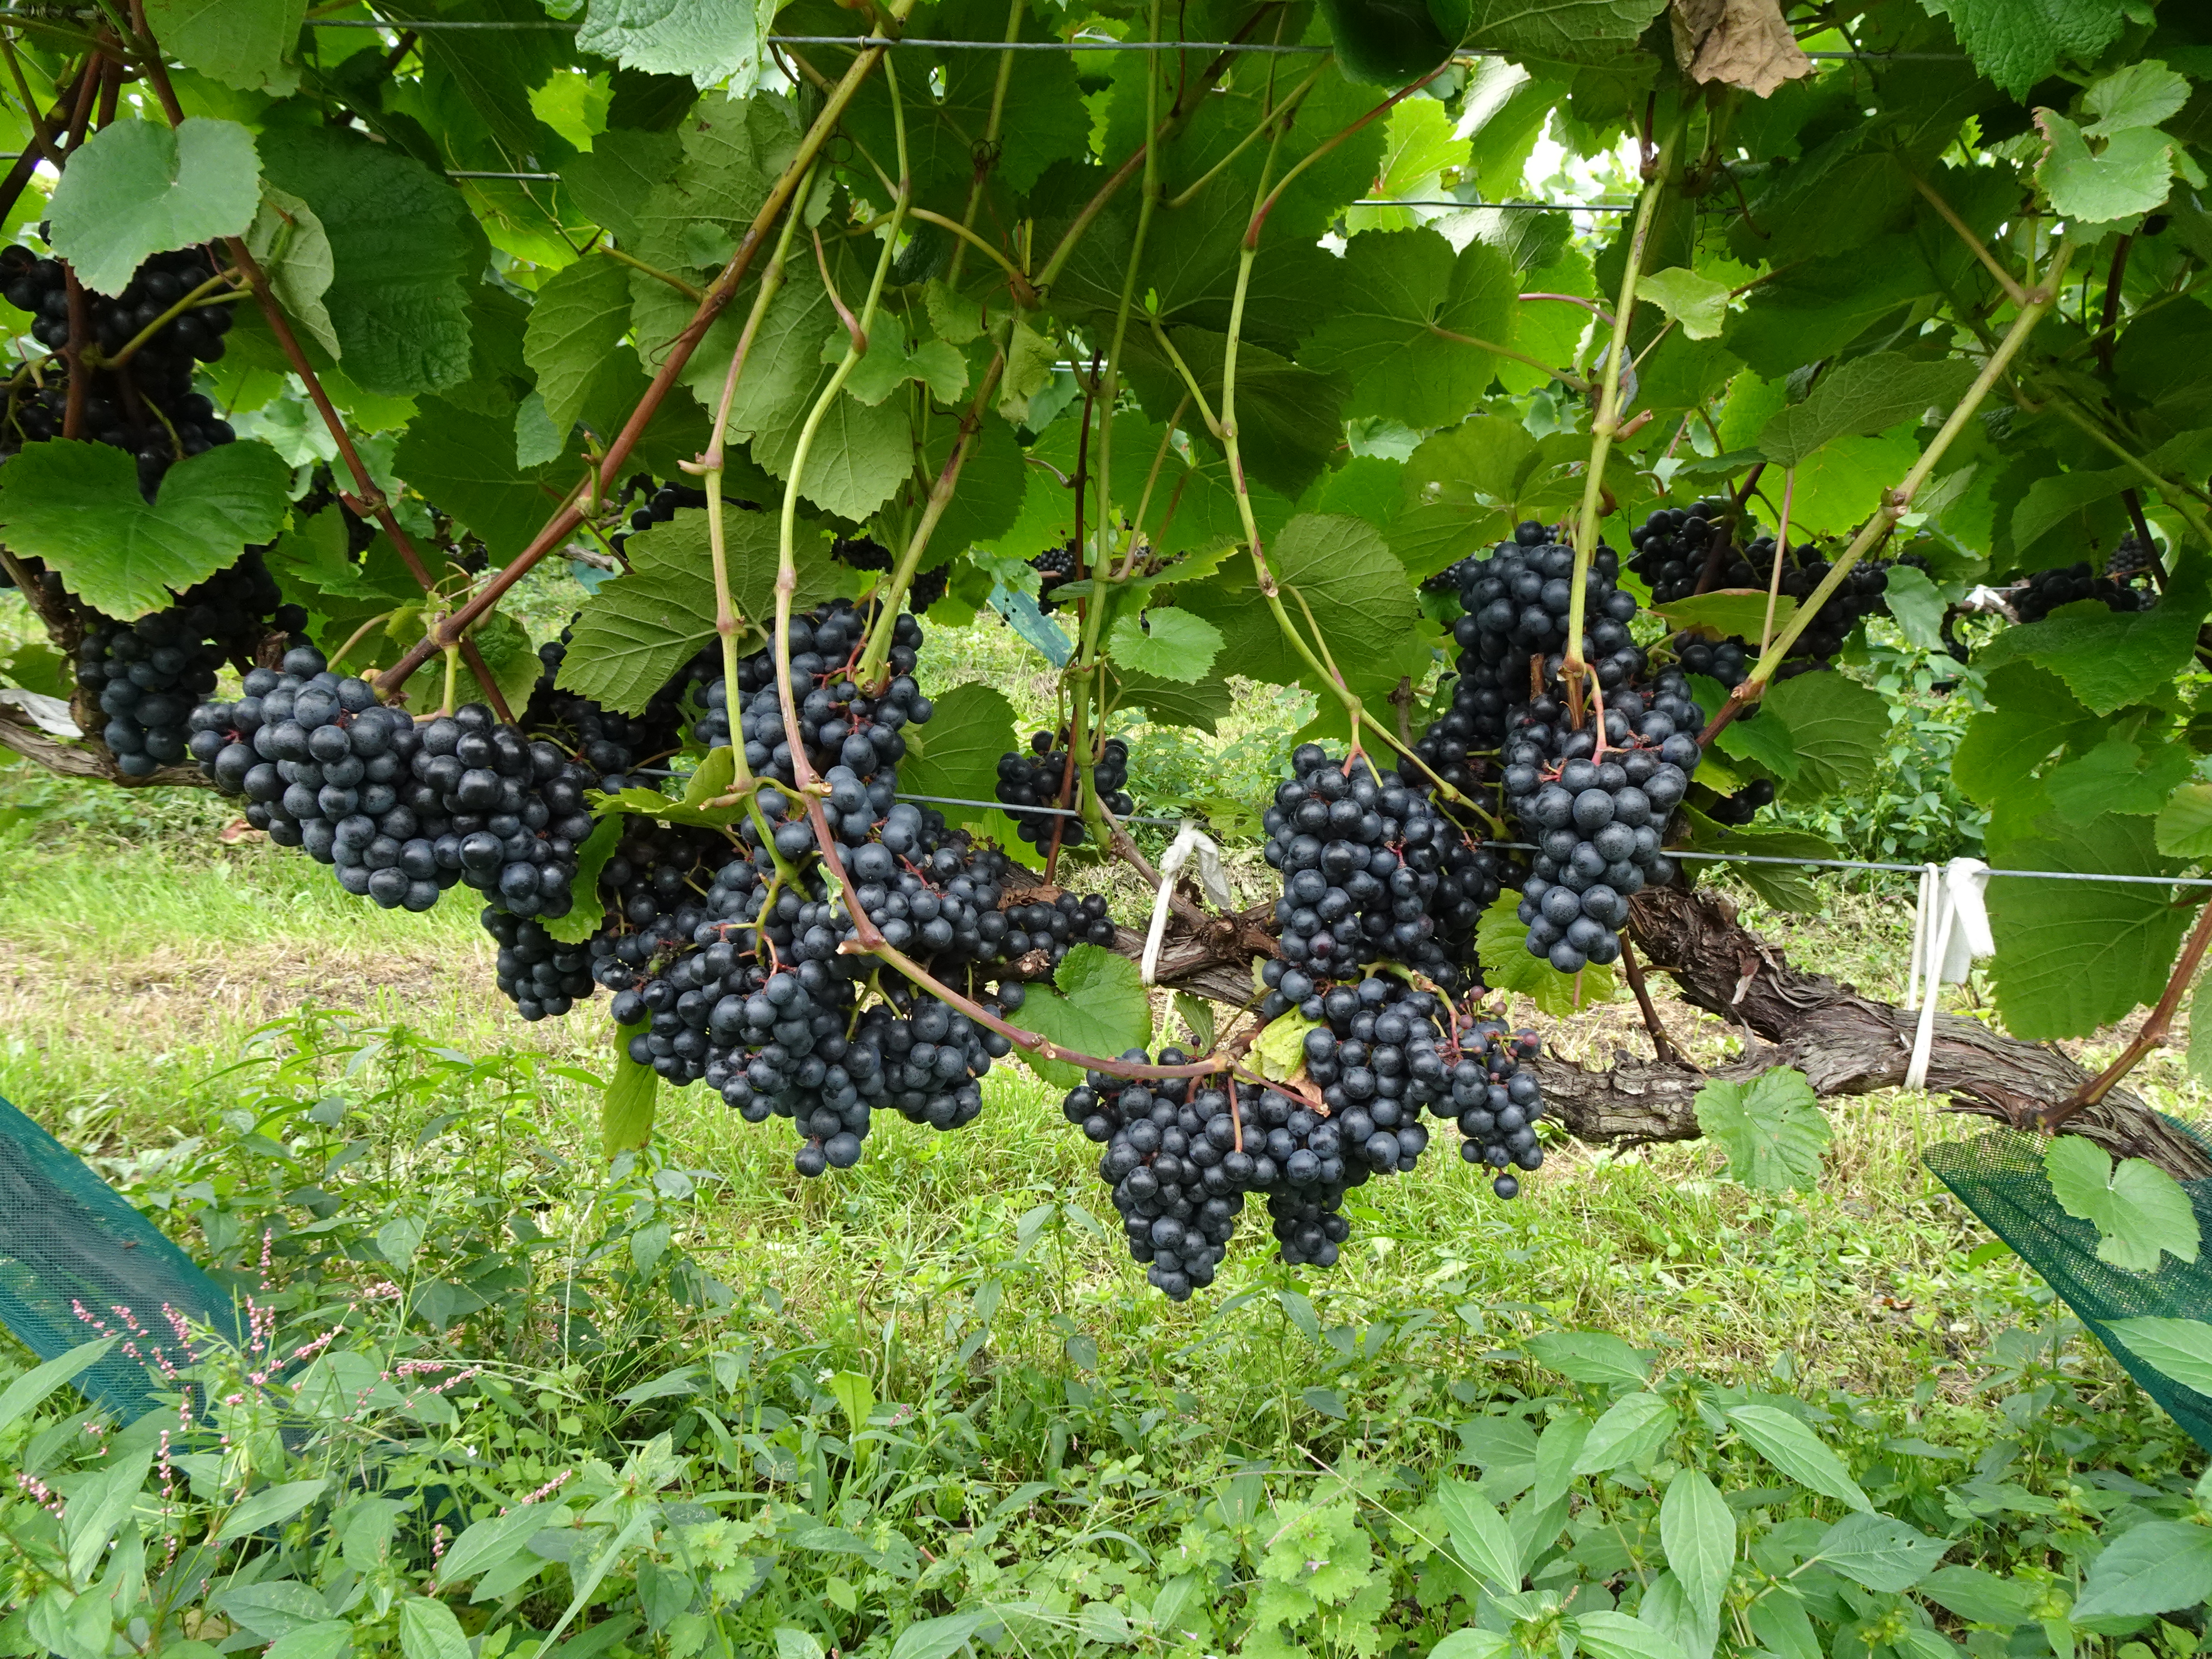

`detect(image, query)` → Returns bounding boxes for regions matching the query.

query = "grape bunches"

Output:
[997,735,1085,857]
[1265,1145,1371,1268]
[0,361,242,504]
[188,645,330,844]
[708,955,843,1120]
[1264,744,1382,1021]
[1451,522,1650,693]
[602,810,746,913]
[2012,562,2141,625]
[1368,770,1461,992]
[520,610,715,790]
[846,970,1025,1130]
[1410,986,1545,1200]
[0,544,46,588]
[1396,648,1532,826]
[593,890,716,1091]
[606,490,681,558]
[706,766,1009,967]
[1430,839,1525,946]
[1500,667,1704,973]
[40,569,218,777]
[1627,501,1889,692]
[403,702,594,919]
[770,1028,886,1175]
[204,544,318,659]
[243,673,462,912]
[1063,1048,1243,1301]
[1205,1089,1347,1189]
[1057,724,1134,815]
[948,892,1111,968]
[1302,978,1440,1176]
[683,597,936,785]
[788,1009,883,1177]
[480,885,597,1022]
[0,219,241,397]
[1706,779,1777,829]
